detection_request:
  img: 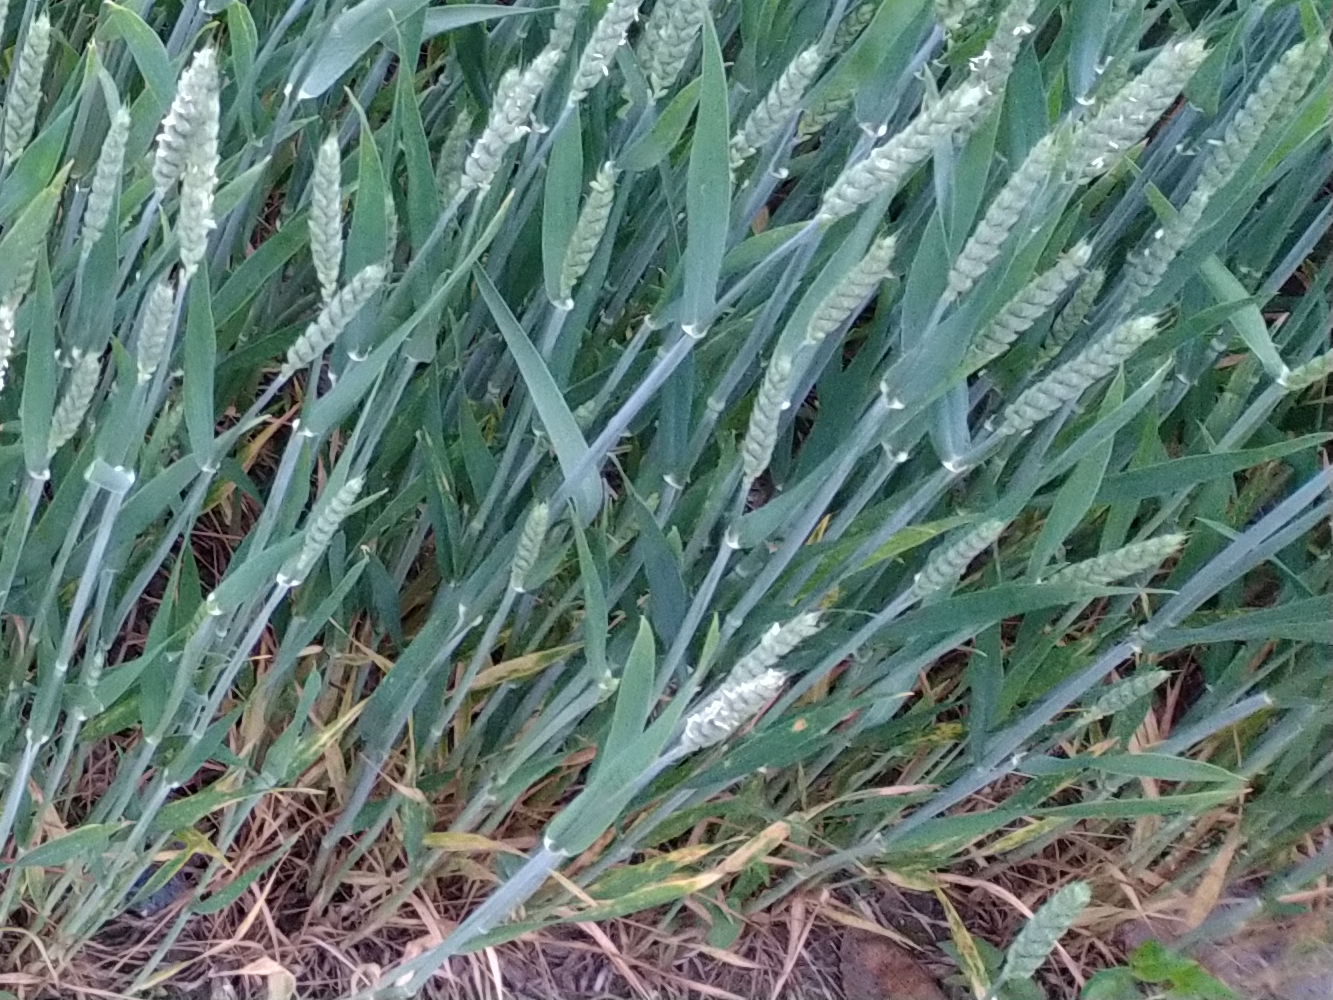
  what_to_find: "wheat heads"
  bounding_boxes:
[48,353,104,450]
[684,673,788,746]
[727,48,823,176]
[967,0,1039,132]
[1107,50,1135,104]
[6,194,58,303]
[310,478,365,567]
[947,138,1058,300]
[651,0,730,95]
[798,87,857,136]
[637,0,712,60]
[4,17,52,162]
[465,55,560,190]
[1074,50,1204,180]
[1040,535,1186,586]
[549,0,596,55]
[1196,42,1329,184]
[83,110,131,247]
[287,268,387,366]
[1260,33,1331,138]
[963,247,1090,369]
[914,523,1006,597]
[1082,669,1169,721]
[828,3,878,58]
[1036,272,1106,364]
[513,505,550,583]
[1001,882,1094,990]
[383,190,397,274]
[311,137,344,297]
[809,237,897,341]
[0,304,17,411]
[1123,165,1225,301]
[743,356,794,474]
[819,83,979,222]
[170,80,221,263]
[572,0,670,98]
[1076,39,1177,160]
[159,50,199,181]
[488,79,524,173]
[997,321,1160,433]
[562,165,618,291]
[1282,351,1332,388]
[137,285,176,376]
[721,615,822,692]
